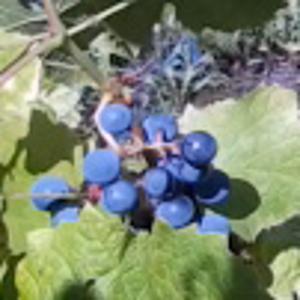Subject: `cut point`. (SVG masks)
<instances>
[{
    "label": "cut point",
    "mask_w": 300,
    "mask_h": 300,
    "mask_svg": "<svg viewBox=\"0 0 300 300\" xmlns=\"http://www.w3.org/2000/svg\"><path fill=\"white\" fill-rule=\"evenodd\" d=\"M111 96L106 93L104 97L102 98L100 104L98 105L96 109V124L99 132L102 134V136L110 143L112 147H115L117 145L116 139L108 132V130L105 128L104 121H103V112L105 108L107 107L109 101L111 100Z\"/></svg>",
    "instance_id": "1"
}]
</instances>
